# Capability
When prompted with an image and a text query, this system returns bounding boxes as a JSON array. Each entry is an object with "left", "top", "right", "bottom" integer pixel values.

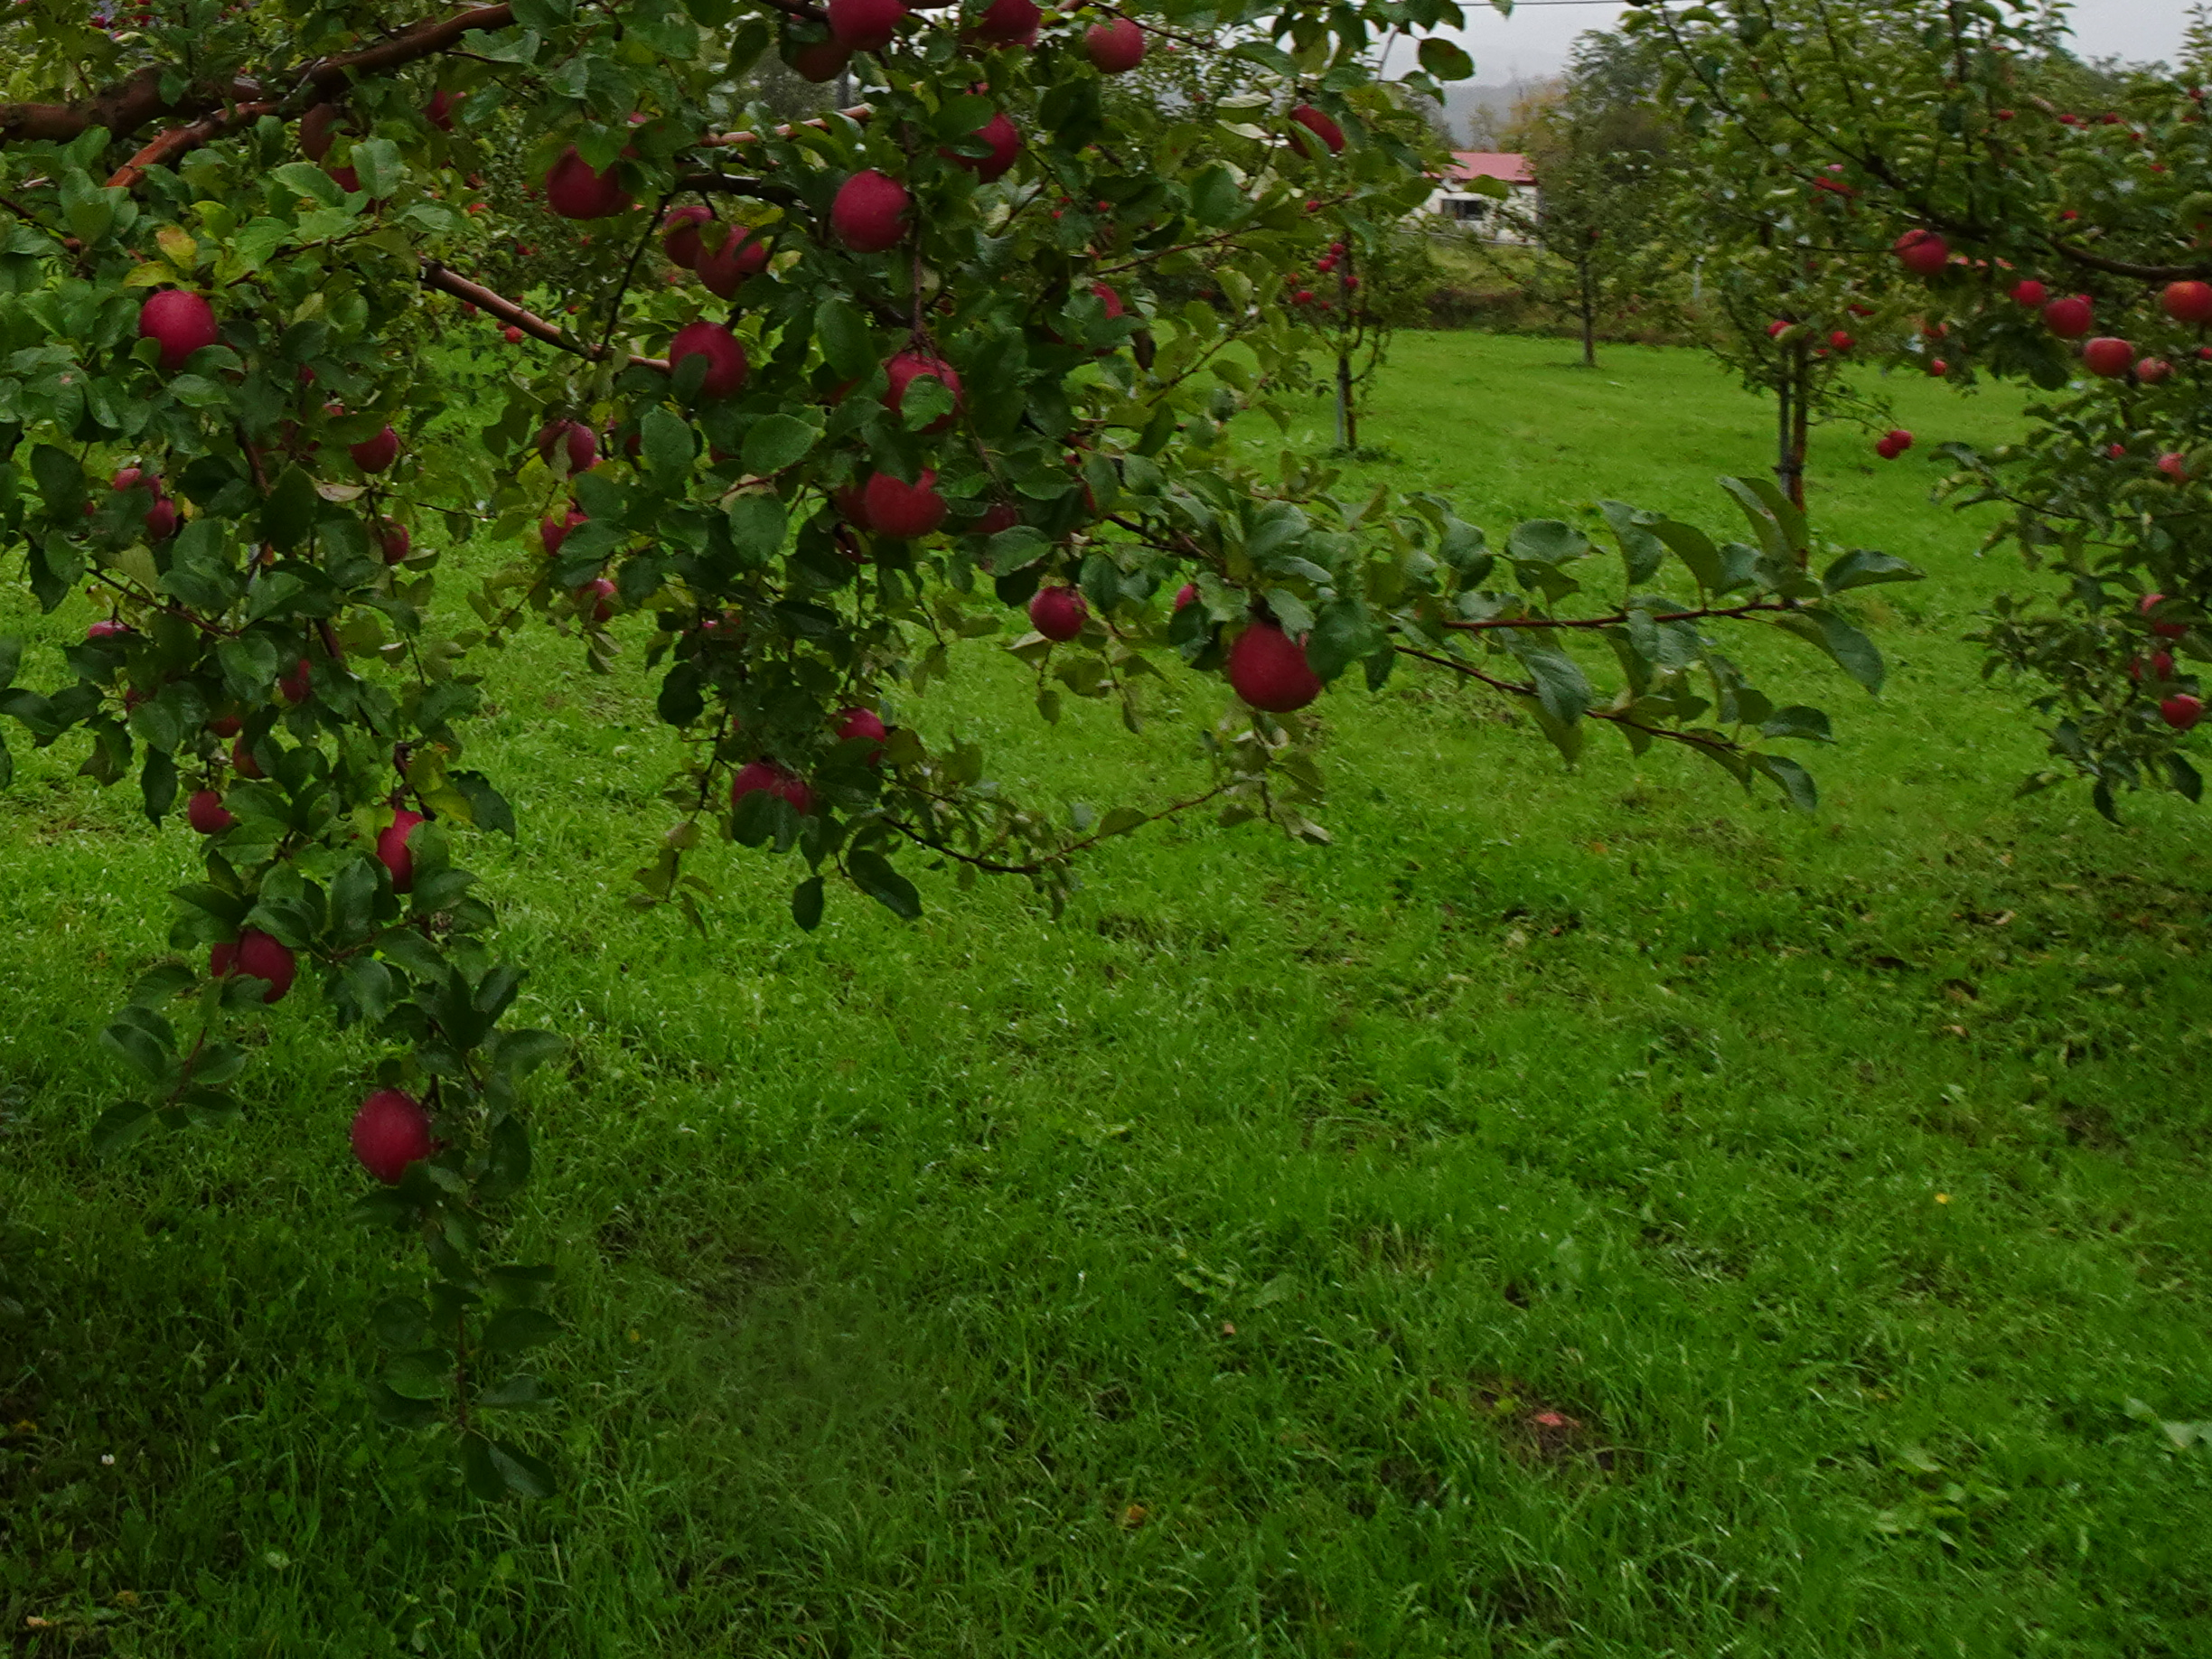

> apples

[
  {"left": 138, "top": 290, "right": 216, "bottom": 369},
  {"left": 790, "top": 13, "right": 846, "bottom": 81},
  {"left": 323, "top": 402, "right": 358, "bottom": 420},
  {"left": 539, "top": 418, "right": 595, "bottom": 473},
  {"left": 934, "top": 85, "right": 1018, "bottom": 185},
  {"left": 669, "top": 322, "right": 744, "bottom": 397},
  {"left": 232, "top": 735, "right": 268, "bottom": 779},
  {"left": 567, "top": 456, "right": 604, "bottom": 480},
  {"left": 348, "top": 426, "right": 398, "bottom": 474},
  {"left": 300, "top": 102, "right": 340, "bottom": 161},
  {"left": 827, "top": 0, "right": 907, "bottom": 52},
  {"left": 1030, "top": 585, "right": 1086, "bottom": 642},
  {"left": 211, "top": 928, "right": 294, "bottom": 1004},
  {"left": 352, "top": 1089, "right": 441, "bottom": 1186},
  {"left": 143, "top": 500, "right": 175, "bottom": 538},
  {"left": 665, "top": 205, "right": 711, "bottom": 270},
  {"left": 1051, "top": 280, "right": 1123, "bottom": 350},
  {"left": 88, "top": 619, "right": 127, "bottom": 638},
  {"left": 350, "top": 810, "right": 425, "bottom": 894},
  {"left": 1229, "top": 620, "right": 1323, "bottom": 713},
  {"left": 608, "top": 158, "right": 645, "bottom": 216},
  {"left": 834, "top": 524, "right": 871, "bottom": 564},
  {"left": 971, "top": 0, "right": 1042, "bottom": 42},
  {"left": 113, "top": 468, "right": 161, "bottom": 507},
  {"left": 1085, "top": 17, "right": 1143, "bottom": 74},
  {"left": 621, "top": 111, "right": 647, "bottom": 159},
  {"left": 864, "top": 465, "right": 946, "bottom": 540},
  {"left": 831, "top": 375, "right": 860, "bottom": 401},
  {"left": 1176, "top": 582, "right": 1198, "bottom": 610},
  {"left": 730, "top": 760, "right": 810, "bottom": 818},
  {"left": 832, "top": 170, "right": 910, "bottom": 254},
  {"left": 695, "top": 224, "right": 764, "bottom": 300},
  {"left": 1061, "top": 455, "right": 1096, "bottom": 510},
  {"left": 369, "top": 517, "right": 409, "bottom": 566},
  {"left": 212, "top": 716, "right": 241, "bottom": 738},
  {"left": 997, "top": 28, "right": 1051, "bottom": 54},
  {"left": 611, "top": 418, "right": 643, "bottom": 456},
  {"left": 576, "top": 579, "right": 618, "bottom": 623},
  {"left": 973, "top": 504, "right": 1016, "bottom": 534},
  {"left": 324, "top": 164, "right": 377, "bottom": 214},
  {"left": 126, "top": 688, "right": 140, "bottom": 713},
  {"left": 189, "top": 789, "right": 230, "bottom": 835},
  {"left": 279, "top": 660, "right": 312, "bottom": 703},
  {"left": 419, "top": 88, "right": 467, "bottom": 132},
  {"left": 879, "top": 353, "right": 961, "bottom": 435},
  {"left": 683, "top": 612, "right": 741, "bottom": 635},
  {"left": 836, "top": 481, "right": 874, "bottom": 532},
  {"left": 709, "top": 443, "right": 735, "bottom": 464},
  {"left": 1288, "top": 103, "right": 1346, "bottom": 159},
  {"left": 831, "top": 706, "right": 886, "bottom": 767},
  {"left": 541, "top": 511, "right": 589, "bottom": 558},
  {"left": 545, "top": 147, "right": 617, "bottom": 220}
]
